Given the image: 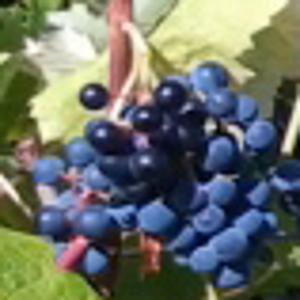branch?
<instances>
[{
	"label": "branch",
	"instance_id": "30e6481e",
	"mask_svg": "<svg viewBox=\"0 0 300 300\" xmlns=\"http://www.w3.org/2000/svg\"><path fill=\"white\" fill-rule=\"evenodd\" d=\"M110 10L107 18V35L110 43L111 65L109 70V105L106 114L110 118L122 116L130 106L129 95L121 88L130 74L135 52L127 35V28L136 13L134 0H107Z\"/></svg>",
	"mask_w": 300,
	"mask_h": 300
}]
</instances>
